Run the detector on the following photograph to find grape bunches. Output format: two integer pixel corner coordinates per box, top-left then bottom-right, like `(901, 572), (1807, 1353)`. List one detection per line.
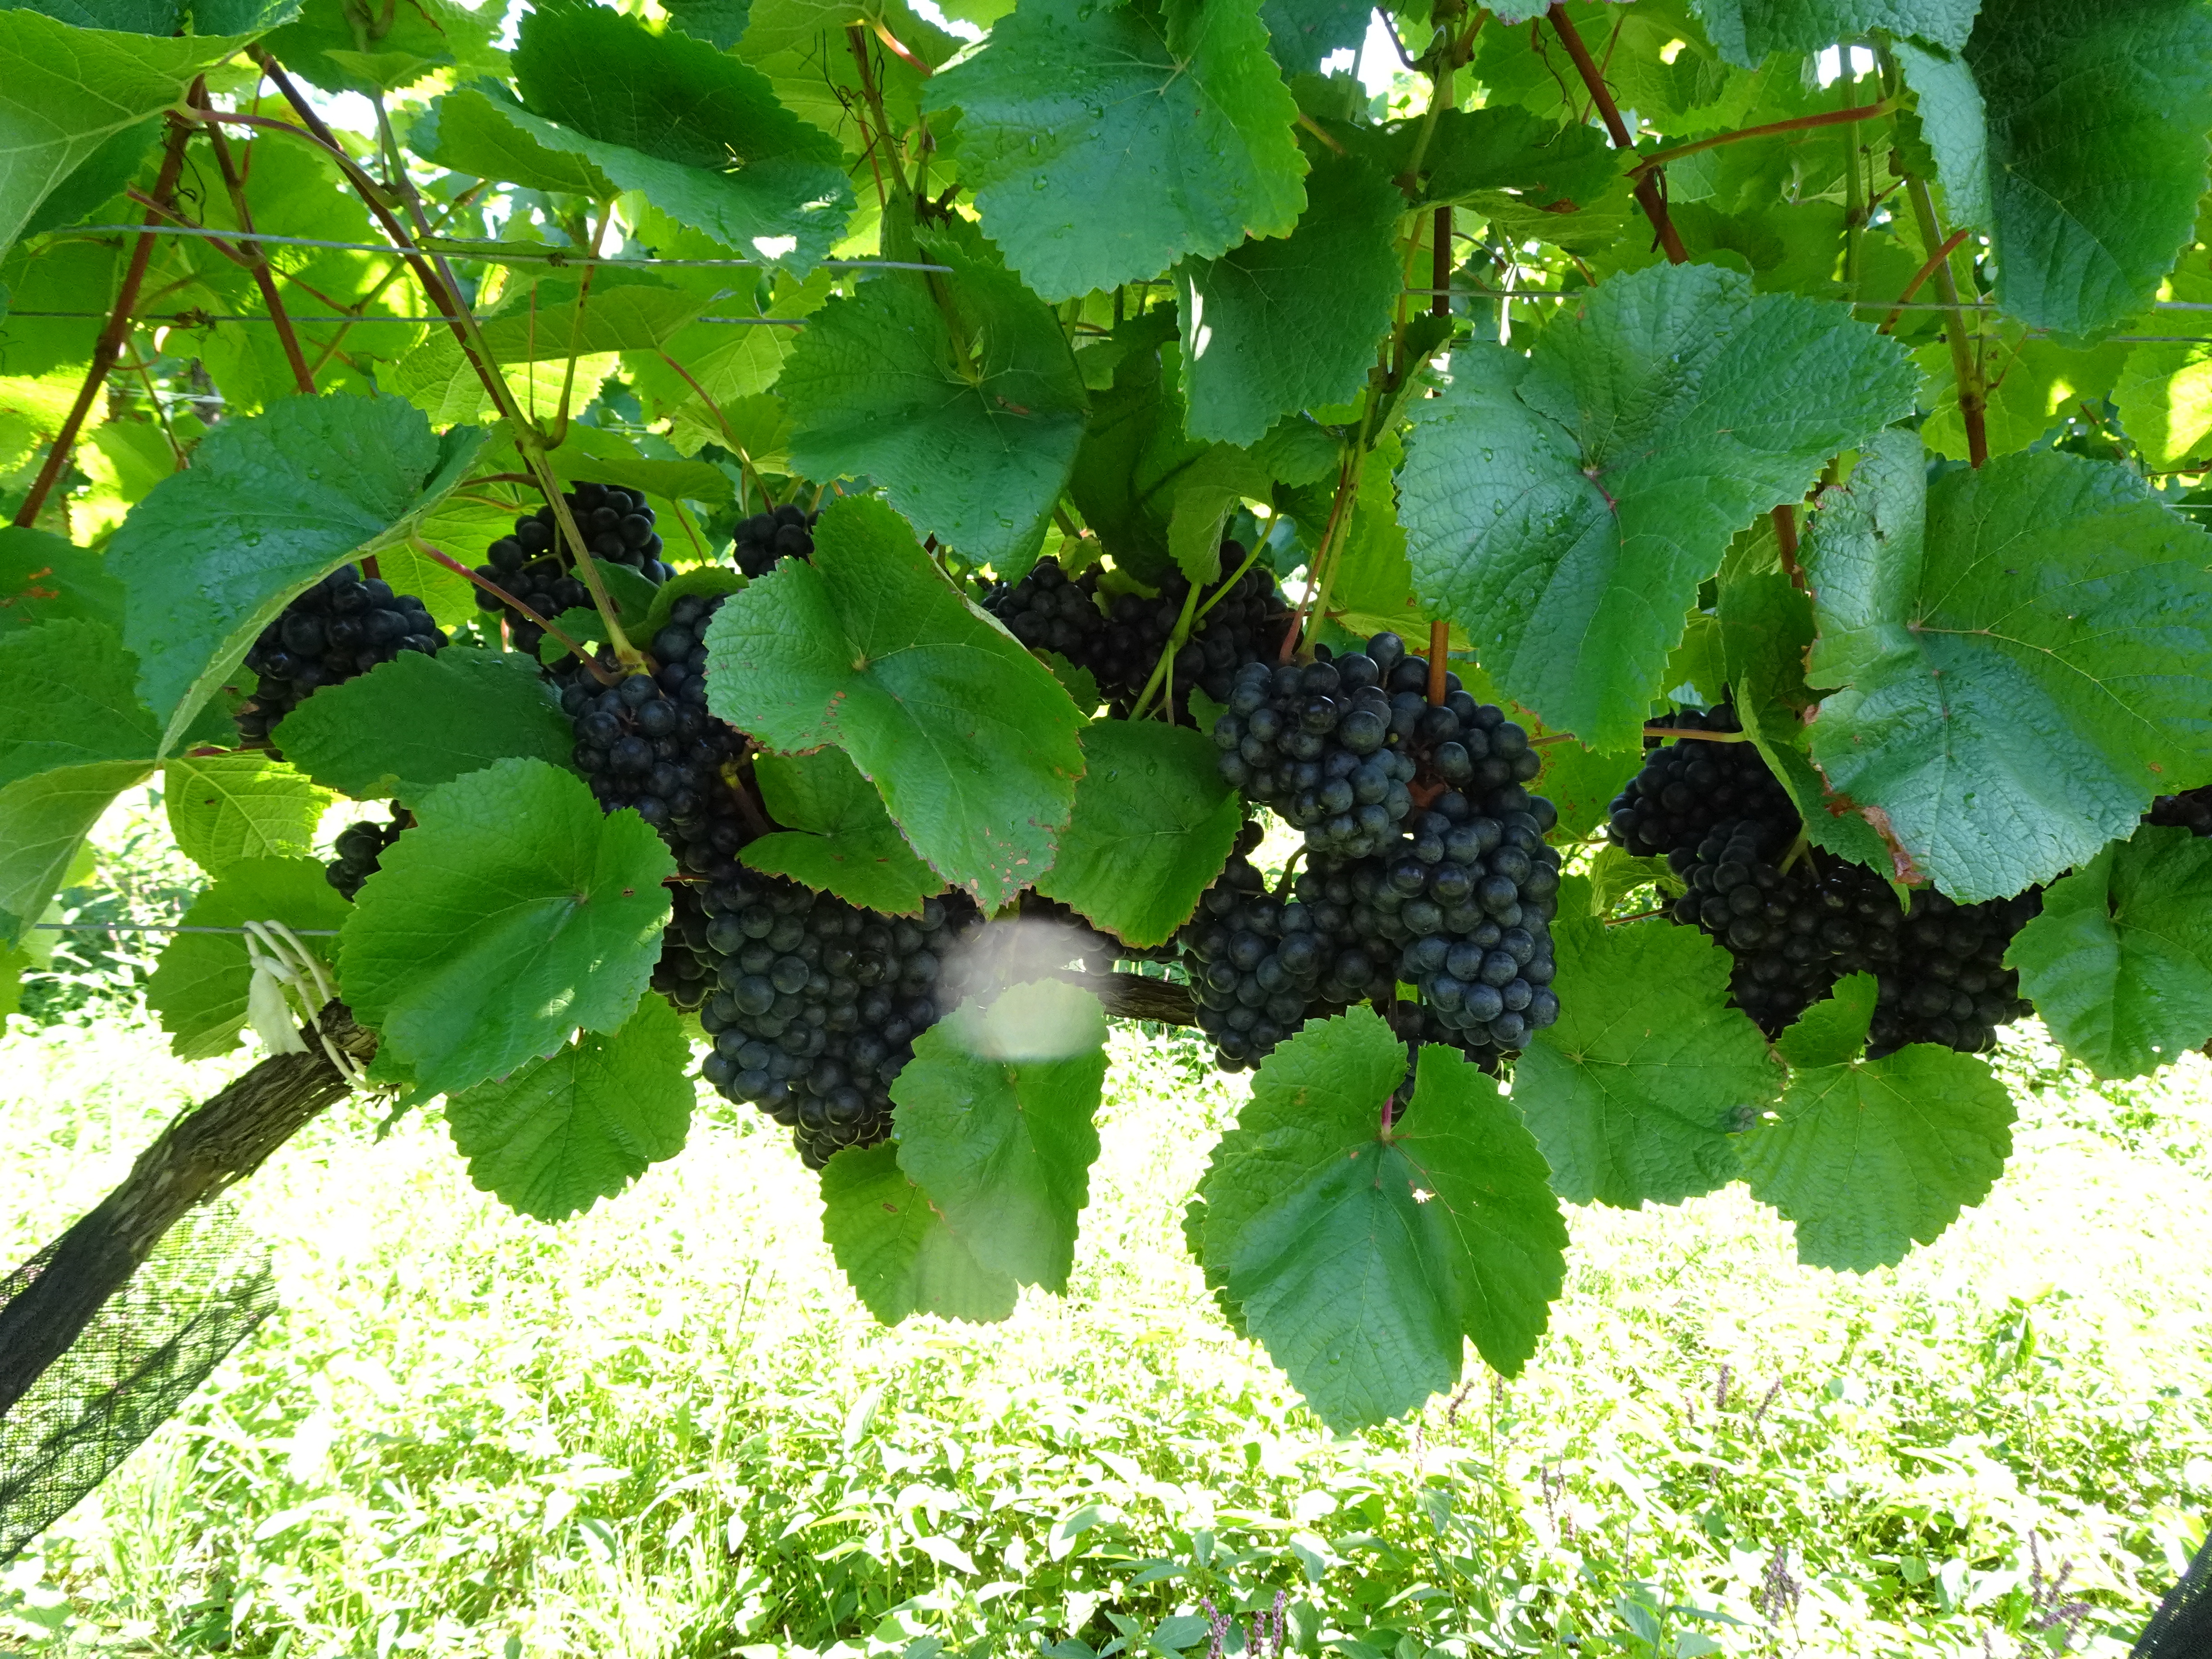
(1233, 793), (1264, 857)
(771, 886), (985, 1170)
(973, 555), (1112, 676)
(651, 593), (745, 757)
(1213, 632), (1416, 861)
(552, 643), (722, 834)
(1080, 934), (1179, 974)
(1018, 882), (1108, 968)
(1388, 655), (1539, 818)
(1295, 850), (1401, 1003)
(733, 503), (826, 579)
(1372, 790), (1561, 1051)
(326, 799), (410, 902)
(650, 879), (721, 1007)
(1655, 819), (1835, 1031)
(1184, 854), (1320, 1072)
(234, 562), (449, 761)
(472, 481), (678, 675)
(1096, 540), (1304, 732)
(1609, 681), (1794, 857)
(677, 817), (884, 1114)
(1810, 866), (2046, 1061)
